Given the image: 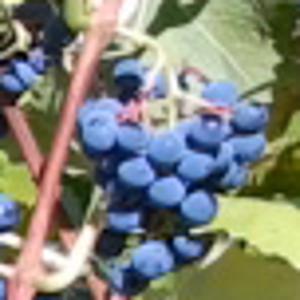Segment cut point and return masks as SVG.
I'll use <instances>...</instances> for the list:
<instances>
[{"label":"cut point","instance_id":"1","mask_svg":"<svg viewBox=\"0 0 300 300\" xmlns=\"http://www.w3.org/2000/svg\"><path fill=\"white\" fill-rule=\"evenodd\" d=\"M114 32L119 36L149 45L158 52L147 73V78L149 80H155L157 78L160 68L167 75H172L174 73V68L167 60V47L160 40L148 34L124 27L121 24H118Z\"/></svg>","mask_w":300,"mask_h":300}]
</instances>
